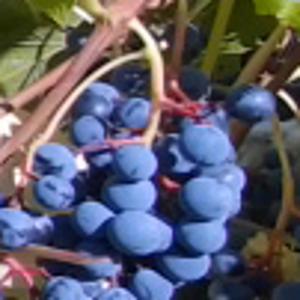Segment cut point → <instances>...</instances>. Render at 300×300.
<instances>
[{"instance_id": "1", "label": "cut point", "mask_w": 300, "mask_h": 300, "mask_svg": "<svg viewBox=\"0 0 300 300\" xmlns=\"http://www.w3.org/2000/svg\"><path fill=\"white\" fill-rule=\"evenodd\" d=\"M127 25L132 28L144 41L145 51L151 67L152 99L163 98V66L160 50L156 45L152 35L137 19L130 18L127 22Z\"/></svg>"}]
</instances>
